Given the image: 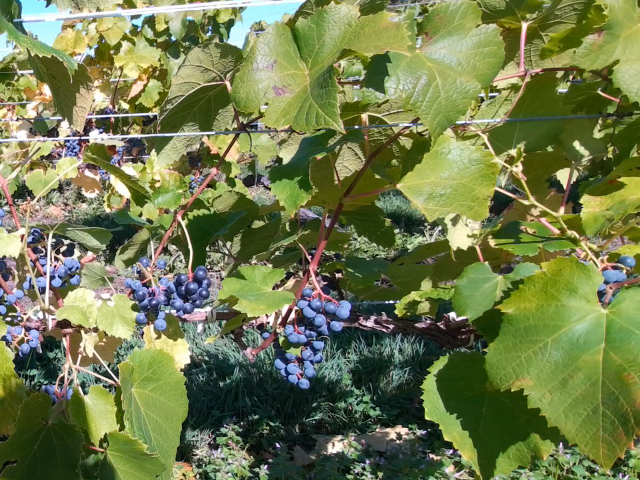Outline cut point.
Segmentation results:
<instances>
[{"label":"cut point","mask_w":640,"mask_h":480,"mask_svg":"<svg viewBox=\"0 0 640 480\" xmlns=\"http://www.w3.org/2000/svg\"><path fill=\"white\" fill-rule=\"evenodd\" d=\"M311 280H312V285H313V287L316 289V291H317V292H320V291H321V290H320V287H321V286L317 283V277H316L315 273H314V275L312 276Z\"/></svg>","instance_id":"7d7e1d6f"},{"label":"cut point","mask_w":640,"mask_h":480,"mask_svg":"<svg viewBox=\"0 0 640 480\" xmlns=\"http://www.w3.org/2000/svg\"><path fill=\"white\" fill-rule=\"evenodd\" d=\"M178 223H179V226H180V229H181L182 233L185 236L186 243L188 245H191L192 241H191V238H190V234H189V231L185 227V223L183 221V218H181V220Z\"/></svg>","instance_id":"6a23745f"}]
</instances>
